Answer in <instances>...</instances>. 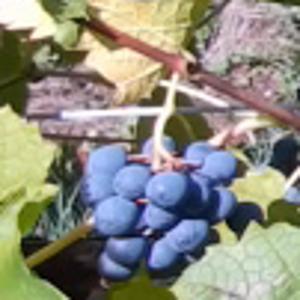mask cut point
<instances>
[{
    "label": "cut point",
    "instance_id": "1",
    "mask_svg": "<svg viewBox=\"0 0 300 300\" xmlns=\"http://www.w3.org/2000/svg\"><path fill=\"white\" fill-rule=\"evenodd\" d=\"M180 80L181 69L179 67H174L172 69L171 86L169 87V92L165 101L164 112L153 125V131L155 133H160L163 128L169 123L172 117V112L177 100L178 91L180 90Z\"/></svg>",
    "mask_w": 300,
    "mask_h": 300
}]
</instances>
